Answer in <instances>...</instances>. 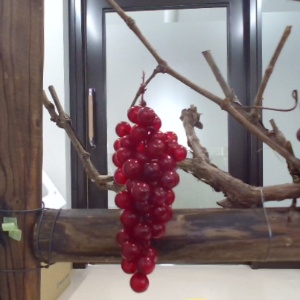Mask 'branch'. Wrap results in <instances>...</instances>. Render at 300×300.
<instances>
[{
    "label": "branch",
    "mask_w": 300,
    "mask_h": 300,
    "mask_svg": "<svg viewBox=\"0 0 300 300\" xmlns=\"http://www.w3.org/2000/svg\"><path fill=\"white\" fill-rule=\"evenodd\" d=\"M106 2L117 11L124 24L137 38L138 42L153 55L157 64L152 70L150 77L146 79L144 84L140 85L130 106H134L143 88L157 74H169L192 90L215 102L216 105L220 106V109L238 120L243 127L255 133L261 141L281 155L287 162L288 172L294 179V184H281L268 188L250 186V184L233 177L231 174L224 172L212 164L209 160L207 149L201 146L195 131V128L203 129V123L200 121L202 113L197 112V107L194 104H191L188 108H184L179 116L180 121L184 124L188 145L192 149V156H188L182 162L178 163L179 169L189 172L194 178L210 185L216 192H221L224 197L216 201V204L223 206V208H264V203L300 199V158L294 154L291 142L285 138L283 132L275 124L274 119H269L271 130L266 129L262 122V96L264 89L274 70L278 56L291 34L293 25H286V29H284V34L269 61L268 67H266L264 78L254 99V105L242 106L235 91L229 87L226 78L221 74L211 50L201 51V54L214 73L217 83L221 86L225 95L224 99L209 90L200 89L197 84H194L188 78L170 68L166 61L159 57L155 47L150 45L145 35L137 26L134 18L125 14V11L114 0H106Z\"/></svg>",
    "instance_id": "1"
},
{
    "label": "branch",
    "mask_w": 300,
    "mask_h": 300,
    "mask_svg": "<svg viewBox=\"0 0 300 300\" xmlns=\"http://www.w3.org/2000/svg\"><path fill=\"white\" fill-rule=\"evenodd\" d=\"M48 90L53 97L55 105L48 99L45 90H42V104L45 105L47 112L51 116L50 121L55 122L58 127L64 129L67 133L82 164L83 172H86L87 178L96 183L97 188L103 191V193H106V190L113 191L114 193H117L119 190H124V186H119L114 183V175H100L98 173L91 162L90 153L81 144L80 139L70 124L69 116H67L60 105L56 87L48 85Z\"/></svg>",
    "instance_id": "2"
}]
</instances>
